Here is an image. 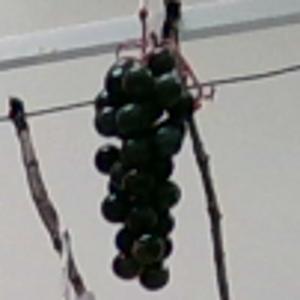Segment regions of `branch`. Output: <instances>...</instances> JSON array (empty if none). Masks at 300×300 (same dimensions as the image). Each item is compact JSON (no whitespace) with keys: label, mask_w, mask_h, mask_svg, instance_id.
I'll use <instances>...</instances> for the list:
<instances>
[{"label":"branch","mask_w":300,"mask_h":300,"mask_svg":"<svg viewBox=\"0 0 300 300\" xmlns=\"http://www.w3.org/2000/svg\"><path fill=\"white\" fill-rule=\"evenodd\" d=\"M8 107L7 119L12 122L14 135L20 146V156L30 200L51 242L52 251L62 262L67 284L75 300H96V294L89 291L85 286L82 273L75 262L69 229L68 227L63 229L61 226L60 214H58L48 193L40 168V158L37 155L34 138L31 135V126L27 120L24 101L19 96L8 95Z\"/></svg>","instance_id":"30e6481e"},{"label":"branch","mask_w":300,"mask_h":300,"mask_svg":"<svg viewBox=\"0 0 300 300\" xmlns=\"http://www.w3.org/2000/svg\"><path fill=\"white\" fill-rule=\"evenodd\" d=\"M189 133L194 162L204 190L206 200L205 213L209 219V240L212 243V256L216 276V288L218 300H232L230 296V283L227 275L226 252L224 251V233L221 206L218 202V195L215 189L212 166L210 165L211 155L205 151V144L200 136L196 117L184 123Z\"/></svg>","instance_id":"325d2c04"},{"label":"branch","mask_w":300,"mask_h":300,"mask_svg":"<svg viewBox=\"0 0 300 300\" xmlns=\"http://www.w3.org/2000/svg\"><path fill=\"white\" fill-rule=\"evenodd\" d=\"M164 18L160 33V44H167L178 50L181 56L180 21L182 0H162Z\"/></svg>","instance_id":"170604dd"}]
</instances>
